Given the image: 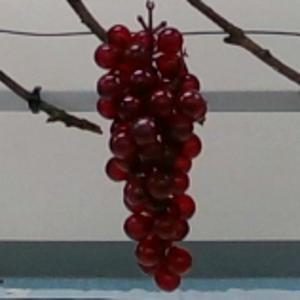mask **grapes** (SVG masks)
<instances>
[{"mask_svg":"<svg viewBox=\"0 0 300 300\" xmlns=\"http://www.w3.org/2000/svg\"><path fill=\"white\" fill-rule=\"evenodd\" d=\"M105 41L94 53L97 66L109 70L95 83L96 112L112 121L108 148L115 157L105 173L112 182L126 181L122 199L132 215L123 231L137 242L138 267L159 290L172 293L192 266L189 251L174 243L187 238V220L196 211L186 194L188 172L203 150L194 123L205 117L208 104L200 80L178 53L184 38L176 28L155 37L115 24Z\"/></svg>","mask_w":300,"mask_h":300,"instance_id":"grapes-1","label":"grapes"}]
</instances>
